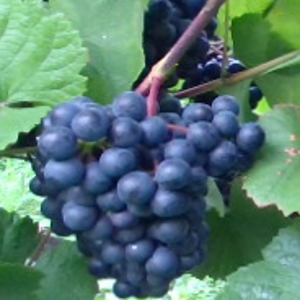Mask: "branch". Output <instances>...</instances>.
<instances>
[{"label":"branch","instance_id":"325d2c04","mask_svg":"<svg viewBox=\"0 0 300 300\" xmlns=\"http://www.w3.org/2000/svg\"><path fill=\"white\" fill-rule=\"evenodd\" d=\"M298 59H300V51H295V52H292L285 56L275 58L272 61H269L267 63L260 64L251 69L238 71L236 74L228 76V77H223V78H219L217 80L209 81V82H206L199 86H195L190 89H186V90H182V91H175L174 93H166L165 96H163V97L184 99L189 96H193V95L202 93L204 91H207L211 88L219 87V86H222L225 84H230V83H234V82L245 80V79H250L252 76H255L259 73L285 67L289 64H292L294 61H296Z\"/></svg>","mask_w":300,"mask_h":300},{"label":"branch","instance_id":"30e6481e","mask_svg":"<svg viewBox=\"0 0 300 300\" xmlns=\"http://www.w3.org/2000/svg\"><path fill=\"white\" fill-rule=\"evenodd\" d=\"M224 2L225 0H207L202 10L196 14L187 26L185 32L180 35L179 39L169 48L167 53L160 58L159 62L151 68V72L135 87V91L147 97L154 81L157 78L161 79L166 70L173 67L181 59L193 45L194 41L201 35L203 29L213 19L214 14Z\"/></svg>","mask_w":300,"mask_h":300}]
</instances>
